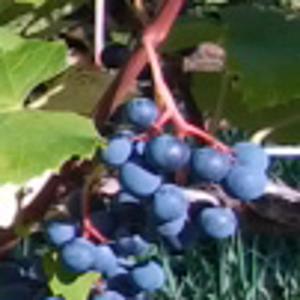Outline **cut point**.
<instances>
[{
  "label": "cut point",
  "mask_w": 300,
  "mask_h": 300,
  "mask_svg": "<svg viewBox=\"0 0 300 300\" xmlns=\"http://www.w3.org/2000/svg\"><path fill=\"white\" fill-rule=\"evenodd\" d=\"M159 61V53L157 47L155 46V49L149 60L151 65V87L153 88V94L156 102L162 107V115L171 120V122L175 125V130L178 133H183L188 129V123L177 112V106L174 104L169 94L166 82L160 71Z\"/></svg>",
  "instance_id": "1"
}]
</instances>
